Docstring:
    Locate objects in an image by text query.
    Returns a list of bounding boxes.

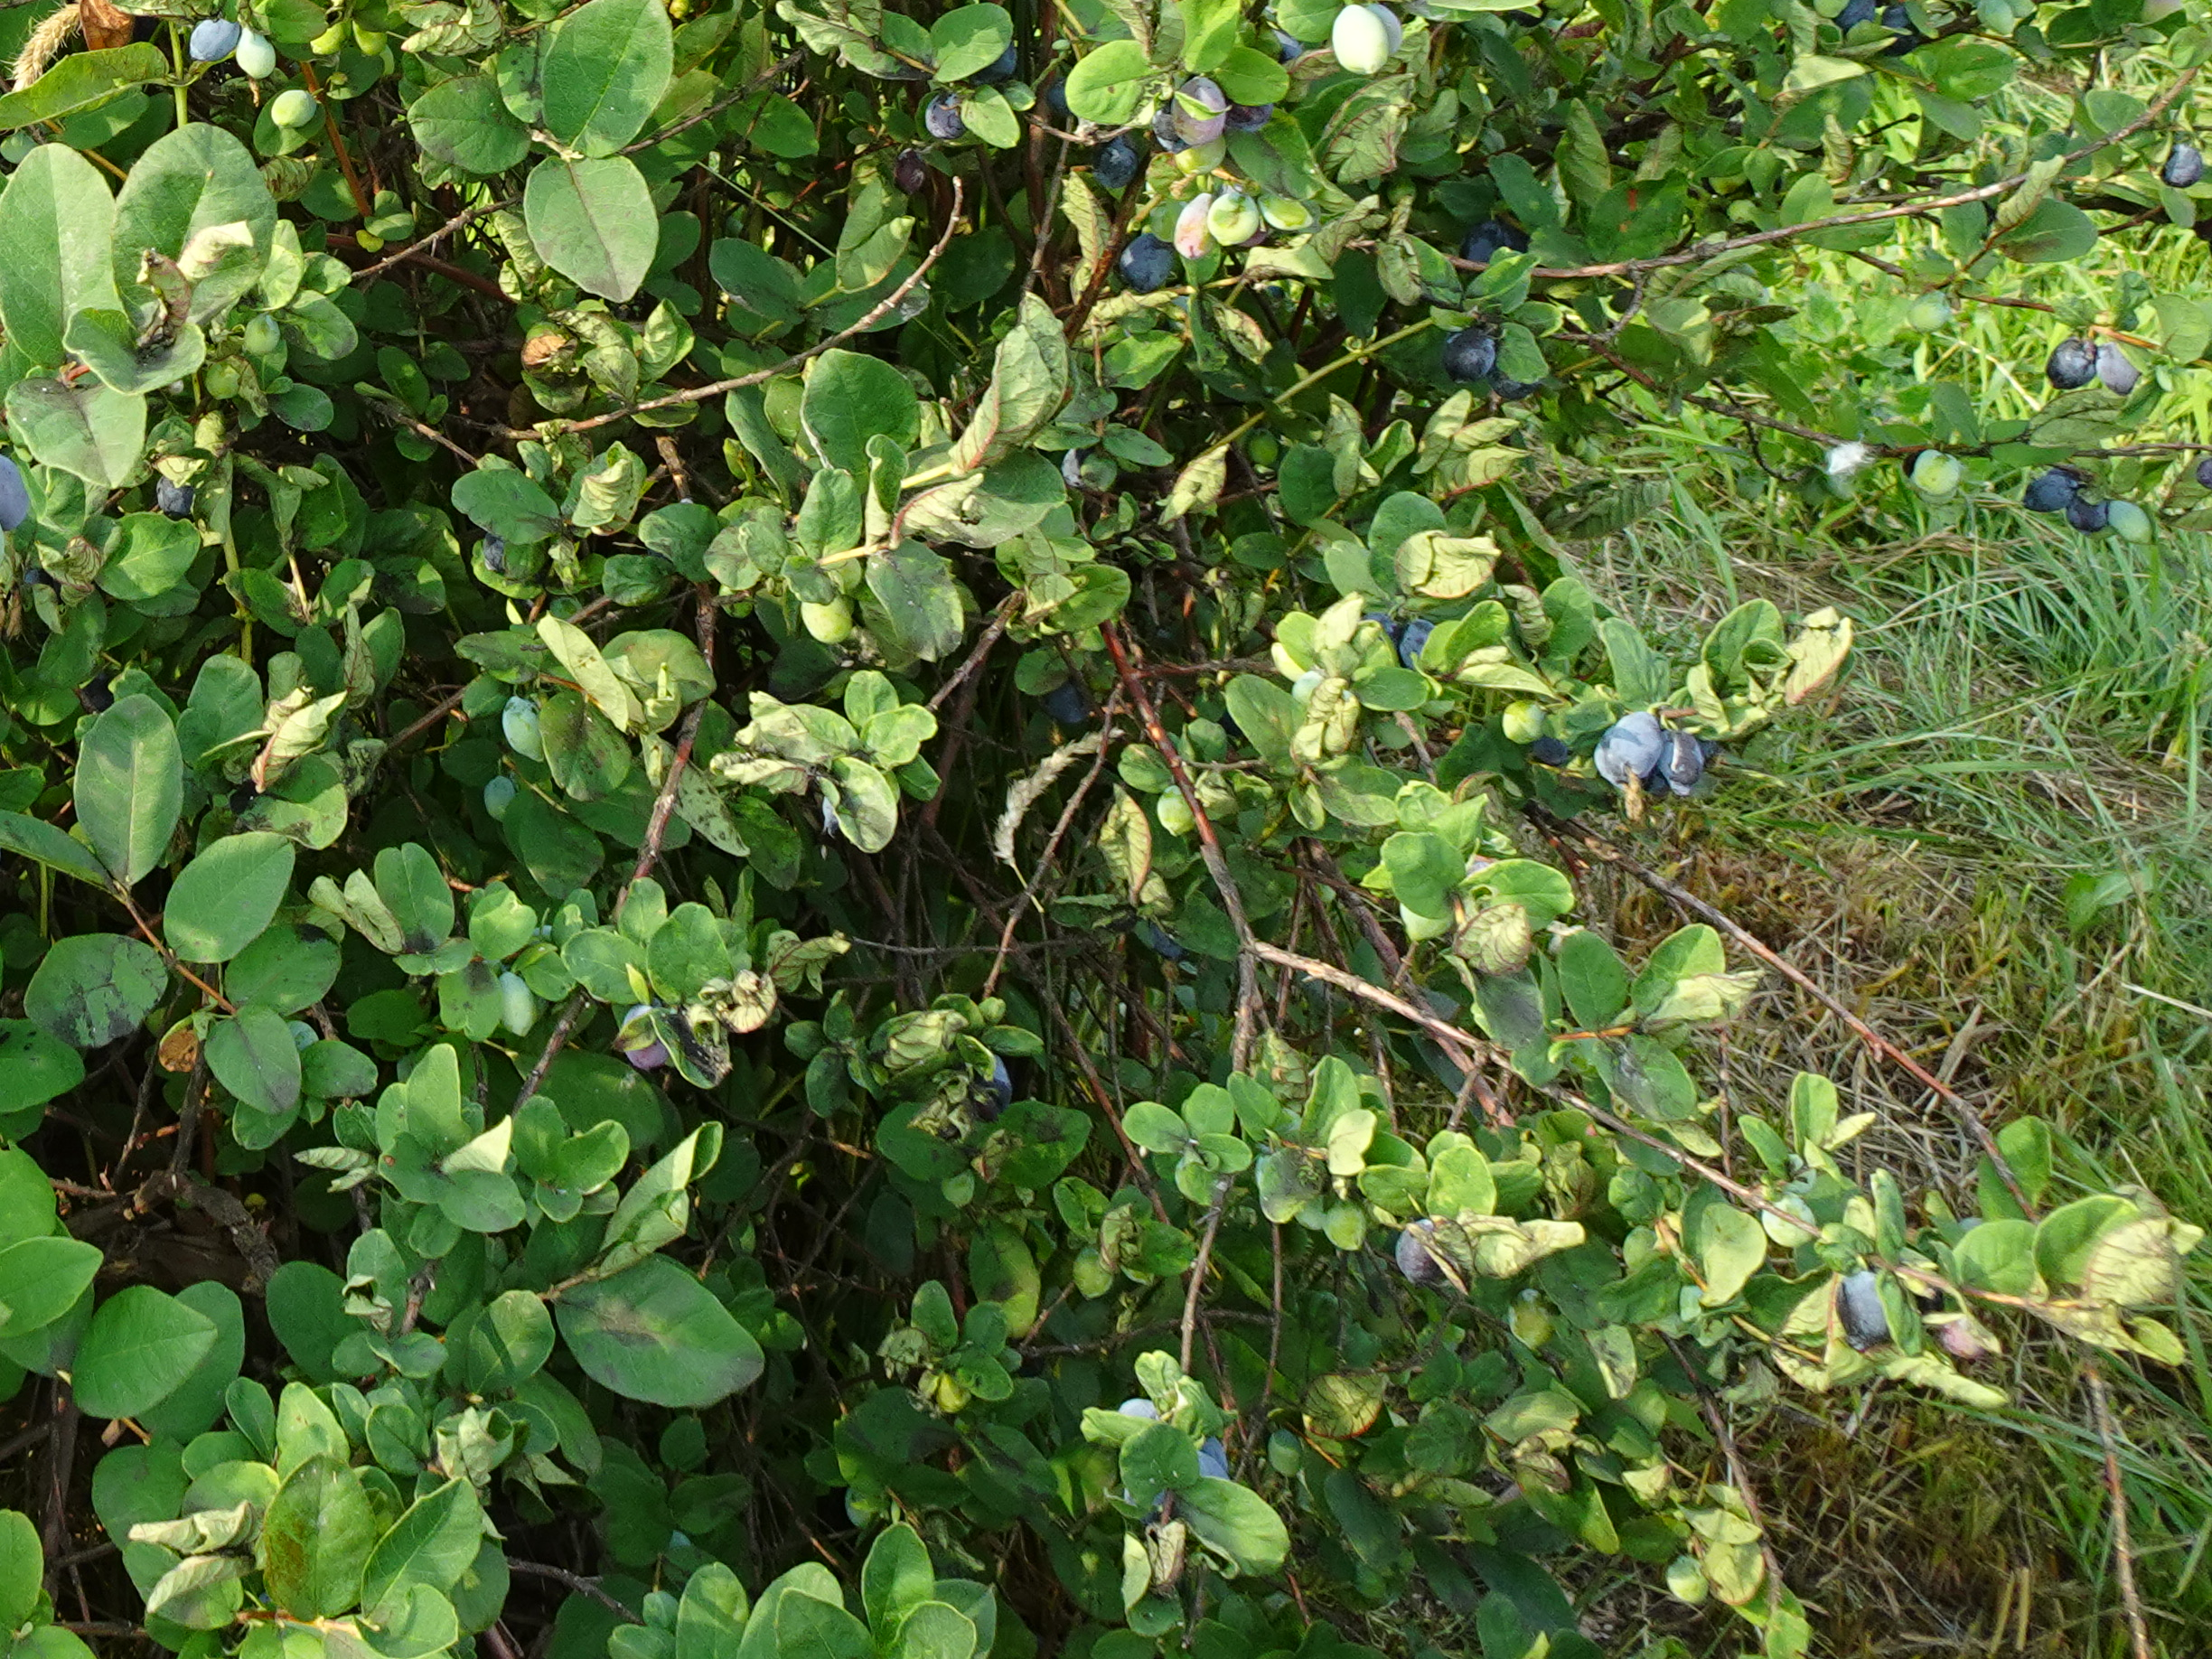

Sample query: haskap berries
[1092,137,1114,170]
[1046,77,1076,115]
[1397,902,1458,941]
[845,1483,883,1528]
[81,678,115,714]
[1761,1193,1815,1246]
[1533,738,1566,765]
[1909,476,1957,508]
[1460,220,1526,267]
[190,17,240,60]
[1259,1147,1321,1224]
[1199,1433,1230,1474]
[970,1056,1014,1120]
[1648,771,1670,797]
[1940,1319,1986,1359]
[1249,427,1278,467]
[1442,327,1494,381]
[24,566,53,590]
[1503,700,1543,745]
[969,41,1018,82]
[1119,231,1174,295]
[237,24,275,79]
[155,473,194,516]
[1659,730,1704,796]
[1876,3,1921,58]
[1836,1271,1893,1350]
[1037,672,1091,720]
[271,89,319,129]
[1509,1288,1552,1346]
[1486,361,1535,399]
[483,531,551,582]
[1147,1451,1232,1539]
[1813,0,1854,19]
[1118,1398,1162,1423]
[1464,861,1492,877]
[1395,1218,1445,1284]
[1915,1291,1943,1333]
[1268,29,1303,60]
[1623,1226,1654,1273]
[1156,783,1196,835]
[310,20,351,55]
[1666,1555,1711,1604]
[2024,476,2074,511]
[1362,3,1402,52]
[2046,339,2098,390]
[286,1018,320,1055]
[1293,670,1324,702]
[0,443,36,529]
[498,971,537,1038]
[1151,918,1186,961]
[2197,460,2212,489]
[1227,92,1272,134]
[1905,288,1949,333]
[484,774,516,822]
[1400,618,1441,670]
[2159,142,2202,189]
[1904,448,1924,479]
[1208,190,1258,247]
[243,311,282,353]
[1071,1244,1114,1299]
[1369,615,1407,668]
[1832,0,1877,32]
[1976,0,2015,35]
[1321,1196,1369,1249]
[927,91,967,140]
[504,695,544,761]
[2047,466,2081,478]
[1257,194,1312,230]
[1595,711,1665,789]
[1173,192,1226,257]
[1913,451,1961,493]
[2068,485,2106,533]
[828,558,861,592]
[1099,137,1138,188]
[1544,0,1564,8]
[1293,1194,1329,1231]
[1331,5,1389,75]
[1508,0,1547,27]
[1125,1486,1176,1525]
[2105,499,2152,544]
[2139,0,2181,25]
[1063,445,1095,488]
[622,1005,670,1071]
[1233,225,1268,248]
[1697,738,1724,762]
[1555,0,1582,15]
[800,598,854,643]
[1994,0,2035,17]
[1267,1429,1301,1477]
[2097,342,2142,395]
[893,148,929,196]
[1157,76,1229,154]
[353,19,389,58]
[1272,643,1306,679]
